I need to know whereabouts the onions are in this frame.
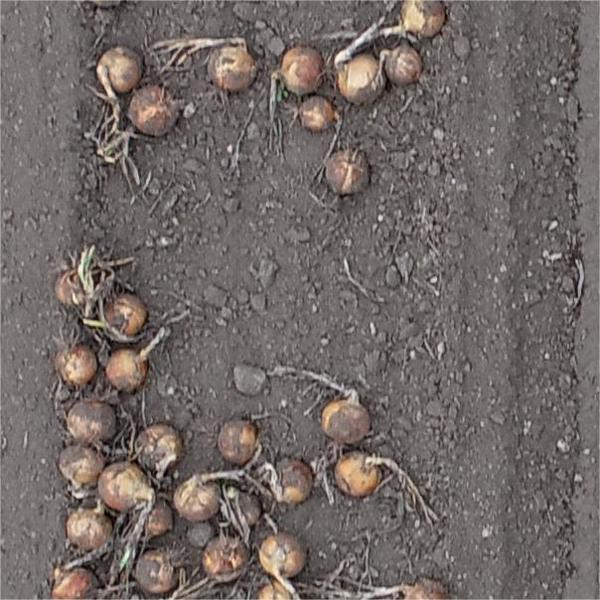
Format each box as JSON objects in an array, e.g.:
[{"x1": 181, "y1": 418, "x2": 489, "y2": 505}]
[
  {"x1": 55, "y1": 343, "x2": 95, "y2": 383},
  {"x1": 258, "y1": 530, "x2": 305, "y2": 575},
  {"x1": 52, "y1": 564, "x2": 93, "y2": 598},
  {"x1": 128, "y1": 83, "x2": 174, "y2": 134},
  {"x1": 298, "y1": 96, "x2": 334, "y2": 130},
  {"x1": 101, "y1": 292, "x2": 146, "y2": 334},
  {"x1": 274, "y1": 459, "x2": 313, "y2": 502},
  {"x1": 187, "y1": 522, "x2": 213, "y2": 547},
  {"x1": 201, "y1": 539, "x2": 245, "y2": 581},
  {"x1": 58, "y1": 442, "x2": 100, "y2": 484},
  {"x1": 66, "y1": 509, "x2": 109, "y2": 550},
  {"x1": 144, "y1": 506, "x2": 173, "y2": 536},
  {"x1": 99, "y1": 463, "x2": 150, "y2": 511},
  {"x1": 220, "y1": 491, "x2": 261, "y2": 526},
  {"x1": 252, "y1": 579, "x2": 297, "y2": 600},
  {"x1": 99, "y1": 47, "x2": 141, "y2": 91},
  {"x1": 321, "y1": 398, "x2": 369, "y2": 442},
  {"x1": 105, "y1": 348, "x2": 144, "y2": 389},
  {"x1": 132, "y1": 552, "x2": 175, "y2": 594},
  {"x1": 325, "y1": 150, "x2": 366, "y2": 193},
  {"x1": 175, "y1": 478, "x2": 217, "y2": 520},
  {"x1": 135, "y1": 423, "x2": 181, "y2": 477},
  {"x1": 406, "y1": 583, "x2": 449, "y2": 599},
  {"x1": 336, "y1": 53, "x2": 383, "y2": 101},
  {"x1": 66, "y1": 399, "x2": 111, "y2": 439},
  {"x1": 399, "y1": 1, "x2": 445, "y2": 36},
  {"x1": 335, "y1": 451, "x2": 383, "y2": 494},
  {"x1": 216, "y1": 419, "x2": 258, "y2": 462},
  {"x1": 282, "y1": 46, "x2": 323, "y2": 91},
  {"x1": 54, "y1": 274, "x2": 83, "y2": 306},
  {"x1": 384, "y1": 47, "x2": 421, "y2": 83},
  {"x1": 211, "y1": 45, "x2": 253, "y2": 91}
]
